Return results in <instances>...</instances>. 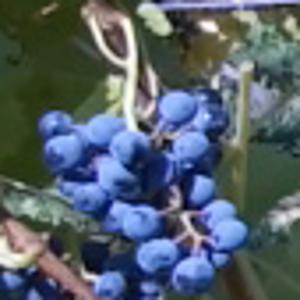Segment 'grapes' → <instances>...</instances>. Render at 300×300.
Masks as SVG:
<instances>
[{
    "label": "grapes",
    "instance_id": "1",
    "mask_svg": "<svg viewBox=\"0 0 300 300\" xmlns=\"http://www.w3.org/2000/svg\"><path fill=\"white\" fill-rule=\"evenodd\" d=\"M133 105L137 128L109 113L75 123L65 110L36 124L58 193L134 244L130 255L99 241L81 247L94 296L161 300L168 285L179 296L207 294L251 237L239 207L214 199L232 112L212 86L171 88L158 102L137 96Z\"/></svg>",
    "mask_w": 300,
    "mask_h": 300
},
{
    "label": "grapes",
    "instance_id": "2",
    "mask_svg": "<svg viewBox=\"0 0 300 300\" xmlns=\"http://www.w3.org/2000/svg\"><path fill=\"white\" fill-rule=\"evenodd\" d=\"M59 294V284L36 266L28 269H0V295L25 300H54Z\"/></svg>",
    "mask_w": 300,
    "mask_h": 300
}]
</instances>
